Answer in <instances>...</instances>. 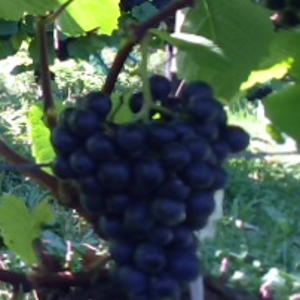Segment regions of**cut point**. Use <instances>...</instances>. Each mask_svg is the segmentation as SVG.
<instances>
[{
  "label": "cut point",
  "instance_id": "6a23745f",
  "mask_svg": "<svg viewBox=\"0 0 300 300\" xmlns=\"http://www.w3.org/2000/svg\"><path fill=\"white\" fill-rule=\"evenodd\" d=\"M141 46V63H140V87L146 88V84L149 82L148 79V66H149V33L145 32L140 37Z\"/></svg>",
  "mask_w": 300,
  "mask_h": 300
}]
</instances>
